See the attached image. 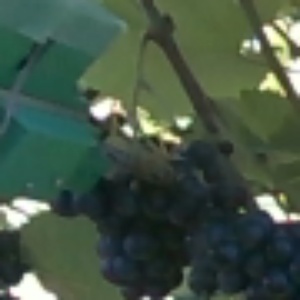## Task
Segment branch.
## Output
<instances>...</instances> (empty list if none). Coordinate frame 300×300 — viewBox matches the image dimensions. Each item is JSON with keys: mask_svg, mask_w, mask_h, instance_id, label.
Here are the masks:
<instances>
[{"mask_svg": "<svg viewBox=\"0 0 300 300\" xmlns=\"http://www.w3.org/2000/svg\"><path fill=\"white\" fill-rule=\"evenodd\" d=\"M141 10L148 22L147 30L150 33L151 42L158 44L170 60L180 82L185 87L198 112L200 123L214 141L217 151L216 164L228 179L235 180L243 189L245 194L243 207L248 214H253L258 210L253 186L246 177L238 173L236 167L227 157L226 147L230 145L228 128L219 116L216 107L205 96L172 37V32L175 30V21L167 14H160L152 0H143Z\"/></svg>", "mask_w": 300, "mask_h": 300, "instance_id": "branch-1", "label": "branch"}, {"mask_svg": "<svg viewBox=\"0 0 300 300\" xmlns=\"http://www.w3.org/2000/svg\"><path fill=\"white\" fill-rule=\"evenodd\" d=\"M240 3L246 8V12L249 15L254 32L261 44L262 50L266 56V60L270 65V68L274 71L278 79L281 81L283 87L286 90L287 95L292 99L299 97V92L295 89L294 84L291 81L290 76L286 73L282 65L279 63L275 52L271 46V42L266 34L258 11L255 8V3L252 0H240Z\"/></svg>", "mask_w": 300, "mask_h": 300, "instance_id": "branch-2", "label": "branch"}]
</instances>
